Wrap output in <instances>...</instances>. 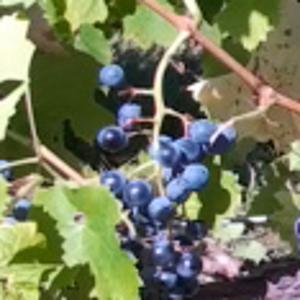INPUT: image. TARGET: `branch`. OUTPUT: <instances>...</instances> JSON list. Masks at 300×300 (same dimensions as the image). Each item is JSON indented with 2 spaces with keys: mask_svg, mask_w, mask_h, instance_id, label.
<instances>
[{
  "mask_svg": "<svg viewBox=\"0 0 300 300\" xmlns=\"http://www.w3.org/2000/svg\"><path fill=\"white\" fill-rule=\"evenodd\" d=\"M144 5L151 11H154L164 17L167 21L179 28L181 31L200 42L214 55L218 56L228 66H230L243 79L250 83L253 87L258 89L260 104L267 108H272L274 105L289 110L294 113H300V101L294 99L285 93L277 91L263 82L260 78L255 76L246 67H244L236 58H234L224 48L220 47L214 40H212L205 33L196 29L192 23L184 17H179L173 13L169 8L156 2L155 0H144Z\"/></svg>",
  "mask_w": 300,
  "mask_h": 300,
  "instance_id": "obj_1",
  "label": "branch"
}]
</instances>
